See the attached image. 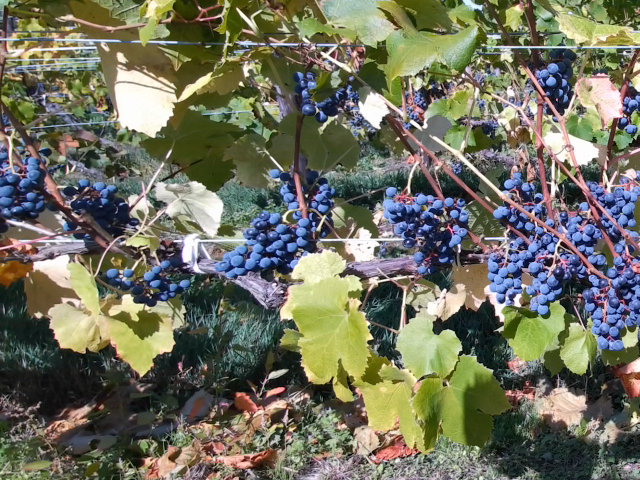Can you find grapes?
<instances>
[{
  "mask_svg": "<svg viewBox=\"0 0 640 480\" xmlns=\"http://www.w3.org/2000/svg\"><path fill=\"white\" fill-rule=\"evenodd\" d=\"M524 174L522 172H513L511 174V178H507L503 183V193L507 195L508 198L512 199L513 194L509 190H513L514 188L520 190V198L525 202L533 203H525L523 206L527 207L530 212H534V216L537 218H541L543 214L547 212V208L543 204V193L537 192L534 195L533 193L536 190V184L534 182H523Z\"/></svg>",
  "mask_w": 640,
  "mask_h": 480,
  "instance_id": "obj_12",
  "label": "grapes"
},
{
  "mask_svg": "<svg viewBox=\"0 0 640 480\" xmlns=\"http://www.w3.org/2000/svg\"><path fill=\"white\" fill-rule=\"evenodd\" d=\"M543 109L545 110V114L552 116V120L555 124H558L559 121L557 120V118L555 117V115H553L552 110L546 105V103L543 104Z\"/></svg>",
  "mask_w": 640,
  "mask_h": 480,
  "instance_id": "obj_19",
  "label": "grapes"
},
{
  "mask_svg": "<svg viewBox=\"0 0 640 480\" xmlns=\"http://www.w3.org/2000/svg\"><path fill=\"white\" fill-rule=\"evenodd\" d=\"M617 129L619 131L625 130L627 134L634 135L638 131V127L635 124H628V118L623 117L619 119L617 124Z\"/></svg>",
  "mask_w": 640,
  "mask_h": 480,
  "instance_id": "obj_17",
  "label": "grapes"
},
{
  "mask_svg": "<svg viewBox=\"0 0 640 480\" xmlns=\"http://www.w3.org/2000/svg\"><path fill=\"white\" fill-rule=\"evenodd\" d=\"M599 217L601 221L600 226L603 228L604 232H606L607 235L610 236V239L615 244L614 247L616 252L618 254L628 253L629 255H632L635 252V249L632 246V244L629 243L626 249L625 240L620 236L619 232L606 220L605 216L602 213L599 214Z\"/></svg>",
  "mask_w": 640,
  "mask_h": 480,
  "instance_id": "obj_14",
  "label": "grapes"
},
{
  "mask_svg": "<svg viewBox=\"0 0 640 480\" xmlns=\"http://www.w3.org/2000/svg\"><path fill=\"white\" fill-rule=\"evenodd\" d=\"M397 194L396 187H388L385 189L386 198L382 202L385 209L383 218L388 223L395 225L393 228L394 235H402V247L412 249L416 244V237L425 239L424 249L421 252L414 253L412 259L415 263H422L428 255V251L436 247V242H441L437 246V256L430 259L431 263H454L453 248L457 244H461L463 237L467 236V227H460L459 224H466L469 221V213L462 209L466 206L464 198H458L455 201L453 196L446 197L443 201L435 199L433 195H425L424 193H415L410 205H404L395 202L394 198ZM448 212L451 219H457L458 224L452 226L451 233L448 229L443 232H434V228L440 226V220L434 218L443 216V208H453Z\"/></svg>",
  "mask_w": 640,
  "mask_h": 480,
  "instance_id": "obj_3",
  "label": "grapes"
},
{
  "mask_svg": "<svg viewBox=\"0 0 640 480\" xmlns=\"http://www.w3.org/2000/svg\"><path fill=\"white\" fill-rule=\"evenodd\" d=\"M270 179H279L281 182H289V184L282 185L278 190V196L283 197V203L285 209L299 208V202L296 200V193L293 191L295 187V181L291 177L288 171L281 173L278 169H271L269 171Z\"/></svg>",
  "mask_w": 640,
  "mask_h": 480,
  "instance_id": "obj_13",
  "label": "grapes"
},
{
  "mask_svg": "<svg viewBox=\"0 0 640 480\" xmlns=\"http://www.w3.org/2000/svg\"><path fill=\"white\" fill-rule=\"evenodd\" d=\"M78 188L66 186L62 190L64 196H73L77 192L82 193L85 188L99 192L97 198L90 201L88 198L75 199L70 208L80 215L82 211H87L91 217L96 220L100 227L113 238H117L123 234L120 225L137 226L139 220L137 218H129L130 206L126 203V199L115 194L119 191L116 184L106 185L104 182L91 183L87 178L80 177L76 181Z\"/></svg>",
  "mask_w": 640,
  "mask_h": 480,
  "instance_id": "obj_6",
  "label": "grapes"
},
{
  "mask_svg": "<svg viewBox=\"0 0 640 480\" xmlns=\"http://www.w3.org/2000/svg\"><path fill=\"white\" fill-rule=\"evenodd\" d=\"M315 78L316 74L313 72L294 71L293 82L298 83L294 87V93L301 95L300 112L306 116H315V121L318 124H324L328 118L338 115L336 106L339 105L340 100L346 97V88L341 87L332 98L328 97L321 102L312 103L308 89H314L317 86Z\"/></svg>",
  "mask_w": 640,
  "mask_h": 480,
  "instance_id": "obj_11",
  "label": "grapes"
},
{
  "mask_svg": "<svg viewBox=\"0 0 640 480\" xmlns=\"http://www.w3.org/2000/svg\"><path fill=\"white\" fill-rule=\"evenodd\" d=\"M299 164H298V172L305 179L307 184H302L301 189L303 193H306L309 189V186L314 184L313 180H316L319 177V174L314 170H306L307 160L303 155L299 156Z\"/></svg>",
  "mask_w": 640,
  "mask_h": 480,
  "instance_id": "obj_16",
  "label": "grapes"
},
{
  "mask_svg": "<svg viewBox=\"0 0 640 480\" xmlns=\"http://www.w3.org/2000/svg\"><path fill=\"white\" fill-rule=\"evenodd\" d=\"M586 186L589 187L593 198L602 205L610 214V216L622 227L624 232L635 241L640 238V233L636 230H629L628 227L636 226V218L634 211L636 203L640 196V187L633 186L630 190L625 191L623 186H615L611 192H606L594 180H587Z\"/></svg>",
  "mask_w": 640,
  "mask_h": 480,
  "instance_id": "obj_9",
  "label": "grapes"
},
{
  "mask_svg": "<svg viewBox=\"0 0 640 480\" xmlns=\"http://www.w3.org/2000/svg\"><path fill=\"white\" fill-rule=\"evenodd\" d=\"M314 188V199L309 208L326 214L334 206L333 195L336 190L328 184L326 177H320ZM314 211L303 219L301 211L291 212L290 219L296 221L297 228H291L281 223L280 213L261 211L251 220L252 228L242 231L246 245H237L231 252L223 254V260L217 261L215 268L224 271L228 278L246 276L248 271L267 270L268 268L285 267L293 270L299 258L295 251L303 248L302 257L314 250V243L310 241V232L318 228L321 217Z\"/></svg>",
  "mask_w": 640,
  "mask_h": 480,
  "instance_id": "obj_2",
  "label": "grapes"
},
{
  "mask_svg": "<svg viewBox=\"0 0 640 480\" xmlns=\"http://www.w3.org/2000/svg\"><path fill=\"white\" fill-rule=\"evenodd\" d=\"M182 263V255L177 253L175 256L171 255L167 260L153 267L151 271L144 272L142 274V280L147 283L149 289H157L149 296H140L144 292V288L141 285H136L130 279L122 280L120 277V271L115 267H110L104 272V277L109 280L108 284L111 287H118L122 291L131 289V294L134 296L132 302L134 304H146L148 307H155L157 301L166 302L169 297L174 298L176 291L179 289H188L191 286V282L188 279H180L178 283L168 284L170 278L168 276L162 277L160 273L162 269L169 268L170 266H177Z\"/></svg>",
  "mask_w": 640,
  "mask_h": 480,
  "instance_id": "obj_7",
  "label": "grapes"
},
{
  "mask_svg": "<svg viewBox=\"0 0 640 480\" xmlns=\"http://www.w3.org/2000/svg\"><path fill=\"white\" fill-rule=\"evenodd\" d=\"M630 97L622 99L623 114L631 116L632 113L640 112V92H637L633 86L629 87Z\"/></svg>",
  "mask_w": 640,
  "mask_h": 480,
  "instance_id": "obj_15",
  "label": "grapes"
},
{
  "mask_svg": "<svg viewBox=\"0 0 640 480\" xmlns=\"http://www.w3.org/2000/svg\"><path fill=\"white\" fill-rule=\"evenodd\" d=\"M612 264L606 270L612 288L607 291L606 322L602 319L604 296L599 292L608 286V280L590 274L588 283L591 286L582 291V301L593 320L591 333L598 335L597 347L621 351L623 341L619 339V330L640 326V274L635 273L632 265L625 263L622 257H613Z\"/></svg>",
  "mask_w": 640,
  "mask_h": 480,
  "instance_id": "obj_4",
  "label": "grapes"
},
{
  "mask_svg": "<svg viewBox=\"0 0 640 480\" xmlns=\"http://www.w3.org/2000/svg\"><path fill=\"white\" fill-rule=\"evenodd\" d=\"M550 59H560L556 63H549L546 68L535 70V77L551 103L558 109L561 116L565 114L573 98L572 84L568 81L573 77L572 69L575 53L571 50L549 52Z\"/></svg>",
  "mask_w": 640,
  "mask_h": 480,
  "instance_id": "obj_8",
  "label": "grapes"
},
{
  "mask_svg": "<svg viewBox=\"0 0 640 480\" xmlns=\"http://www.w3.org/2000/svg\"><path fill=\"white\" fill-rule=\"evenodd\" d=\"M559 223L556 226V231L560 234L566 233V240L571 242L572 246L577 248L580 253H583L588 261L593 266H603L606 263V256L603 253H595V246L597 240H602V229L596 224L593 219H588L582 226V231L577 225H582L585 222L583 215L568 216L566 211L559 213Z\"/></svg>",
  "mask_w": 640,
  "mask_h": 480,
  "instance_id": "obj_10",
  "label": "grapes"
},
{
  "mask_svg": "<svg viewBox=\"0 0 640 480\" xmlns=\"http://www.w3.org/2000/svg\"><path fill=\"white\" fill-rule=\"evenodd\" d=\"M332 217H333V213L332 212H329L327 214V216L325 217V220L328 221L329 226L327 225L326 222L322 223V229H321V232L319 233V236L321 238H325V237L328 236V234L332 233V229L330 227H334L335 226V223H334Z\"/></svg>",
  "mask_w": 640,
  "mask_h": 480,
  "instance_id": "obj_18",
  "label": "grapes"
},
{
  "mask_svg": "<svg viewBox=\"0 0 640 480\" xmlns=\"http://www.w3.org/2000/svg\"><path fill=\"white\" fill-rule=\"evenodd\" d=\"M41 158L23 157L21 162L26 166L23 178L18 172L20 168L15 164L13 170L9 167L8 150L0 142V169L5 170L0 175V214L7 221H18L28 217L36 220L46 209L57 212V205L46 203L45 197L51 199L52 193L45 188L43 178L46 171L39 168V163H46V159L53 154V150L47 146L39 149Z\"/></svg>",
  "mask_w": 640,
  "mask_h": 480,
  "instance_id": "obj_5",
  "label": "grapes"
},
{
  "mask_svg": "<svg viewBox=\"0 0 640 480\" xmlns=\"http://www.w3.org/2000/svg\"><path fill=\"white\" fill-rule=\"evenodd\" d=\"M493 217L501 220L507 217V222L513 224L515 229H525L532 232L528 239L530 244H525L512 232L508 234L509 247L512 249L506 257L500 253H492L488 256L487 279L490 281L489 290L496 293L498 304L513 305L517 294L523 291V277L521 268H527V273L537 276L525 288L530 299L529 309L537 311L539 315L548 313L547 302H555L563 289V283H569L576 274L578 279L587 276V267L574 254L561 251L559 258L565 263H559L553 268V274L543 268L546 265L544 258L536 259V256H552L558 239L549 232L544 233L542 227H535L524 212L502 203L495 208Z\"/></svg>",
  "mask_w": 640,
  "mask_h": 480,
  "instance_id": "obj_1",
  "label": "grapes"
}]
</instances>
